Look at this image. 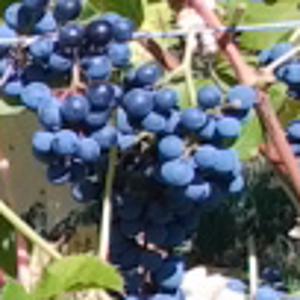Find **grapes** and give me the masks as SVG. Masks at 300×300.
I'll use <instances>...</instances> for the list:
<instances>
[{"label":"grapes","mask_w":300,"mask_h":300,"mask_svg":"<svg viewBox=\"0 0 300 300\" xmlns=\"http://www.w3.org/2000/svg\"><path fill=\"white\" fill-rule=\"evenodd\" d=\"M47 12V0L7 6L0 37L26 34L27 56L46 65L52 75L71 71L79 59L81 76L92 84L84 95L64 100L42 80L11 74L0 92L34 110L45 127L32 135L34 156L50 164L49 184L69 185L77 203H89L100 194L111 151L132 146L136 133L158 137L156 160L141 167L149 185L145 193L131 191L120 199L123 209L111 227L108 260L123 271L124 300H183L186 257L172 255L164 263L161 254L135 244V236L146 232L153 245L177 247L189 230L201 228L204 210L214 197L242 193L244 164L235 150L217 142L243 133L258 91L252 85H234L225 95L222 114L207 115L205 110L221 104L219 88L208 83L198 91L199 108H187L180 115L175 110L176 90L154 88L163 69L153 61L127 72L126 85L106 82L112 69H123L131 61L127 42L135 26L130 17L108 13L81 23V0H59L53 14ZM139 266L147 269L153 286L145 287Z\"/></svg>","instance_id":"01657485"},{"label":"grapes","mask_w":300,"mask_h":300,"mask_svg":"<svg viewBox=\"0 0 300 300\" xmlns=\"http://www.w3.org/2000/svg\"><path fill=\"white\" fill-rule=\"evenodd\" d=\"M283 272L277 263L264 265L260 270V284L254 292V300H278L288 297L291 290L282 281Z\"/></svg>","instance_id":"b958b902"},{"label":"grapes","mask_w":300,"mask_h":300,"mask_svg":"<svg viewBox=\"0 0 300 300\" xmlns=\"http://www.w3.org/2000/svg\"><path fill=\"white\" fill-rule=\"evenodd\" d=\"M275 76L287 85V94L294 100H300V57L296 56L281 62Z\"/></svg>","instance_id":"0513c4c2"},{"label":"grapes","mask_w":300,"mask_h":300,"mask_svg":"<svg viewBox=\"0 0 300 300\" xmlns=\"http://www.w3.org/2000/svg\"><path fill=\"white\" fill-rule=\"evenodd\" d=\"M294 49V43L292 41H279L264 48L258 52V57L262 64H268L277 58L285 56L287 53Z\"/></svg>","instance_id":"84f90ec7"},{"label":"grapes","mask_w":300,"mask_h":300,"mask_svg":"<svg viewBox=\"0 0 300 300\" xmlns=\"http://www.w3.org/2000/svg\"><path fill=\"white\" fill-rule=\"evenodd\" d=\"M290 141L291 152L296 158L300 157V120L291 121L286 128Z\"/></svg>","instance_id":"f8a65327"},{"label":"grapes","mask_w":300,"mask_h":300,"mask_svg":"<svg viewBox=\"0 0 300 300\" xmlns=\"http://www.w3.org/2000/svg\"><path fill=\"white\" fill-rule=\"evenodd\" d=\"M224 285L234 292L241 295H247L252 287V282L244 277H230L224 282Z\"/></svg>","instance_id":"5460f4e3"}]
</instances>
